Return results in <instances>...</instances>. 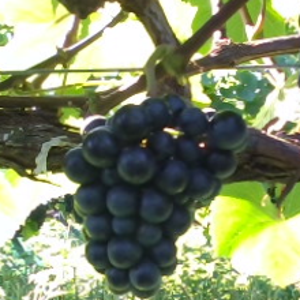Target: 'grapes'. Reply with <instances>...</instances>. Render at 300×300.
Here are the masks:
<instances>
[{
    "mask_svg": "<svg viewBox=\"0 0 300 300\" xmlns=\"http://www.w3.org/2000/svg\"><path fill=\"white\" fill-rule=\"evenodd\" d=\"M247 131L239 113L187 108L174 94L83 121L84 140L62 166L81 182L74 207L91 238L86 258L113 292L148 297L158 290L176 265L173 242L235 173Z\"/></svg>",
    "mask_w": 300,
    "mask_h": 300,
    "instance_id": "01657485",
    "label": "grapes"
}]
</instances>
